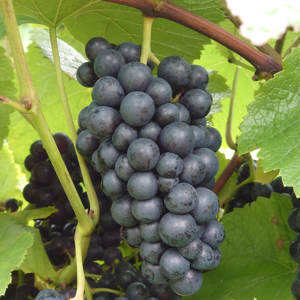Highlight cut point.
<instances>
[{
    "label": "cut point",
    "mask_w": 300,
    "mask_h": 300,
    "mask_svg": "<svg viewBox=\"0 0 300 300\" xmlns=\"http://www.w3.org/2000/svg\"><path fill=\"white\" fill-rule=\"evenodd\" d=\"M141 12L143 16V45L140 62L147 65V61L151 56V26L157 17L145 11Z\"/></svg>",
    "instance_id": "1"
}]
</instances>
